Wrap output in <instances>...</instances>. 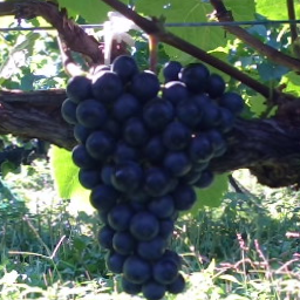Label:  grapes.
<instances>
[{"instance_id": "obj_1", "label": "grapes", "mask_w": 300, "mask_h": 300, "mask_svg": "<svg viewBox=\"0 0 300 300\" xmlns=\"http://www.w3.org/2000/svg\"><path fill=\"white\" fill-rule=\"evenodd\" d=\"M168 82L140 71L131 56L94 66L66 85L63 118L74 125L72 151L81 184L104 223L98 232L106 263L124 287L150 300L185 286L178 253L164 249L179 210L209 186L210 159L223 155L228 133L245 108L223 77L202 63H167Z\"/></svg>"}]
</instances>
